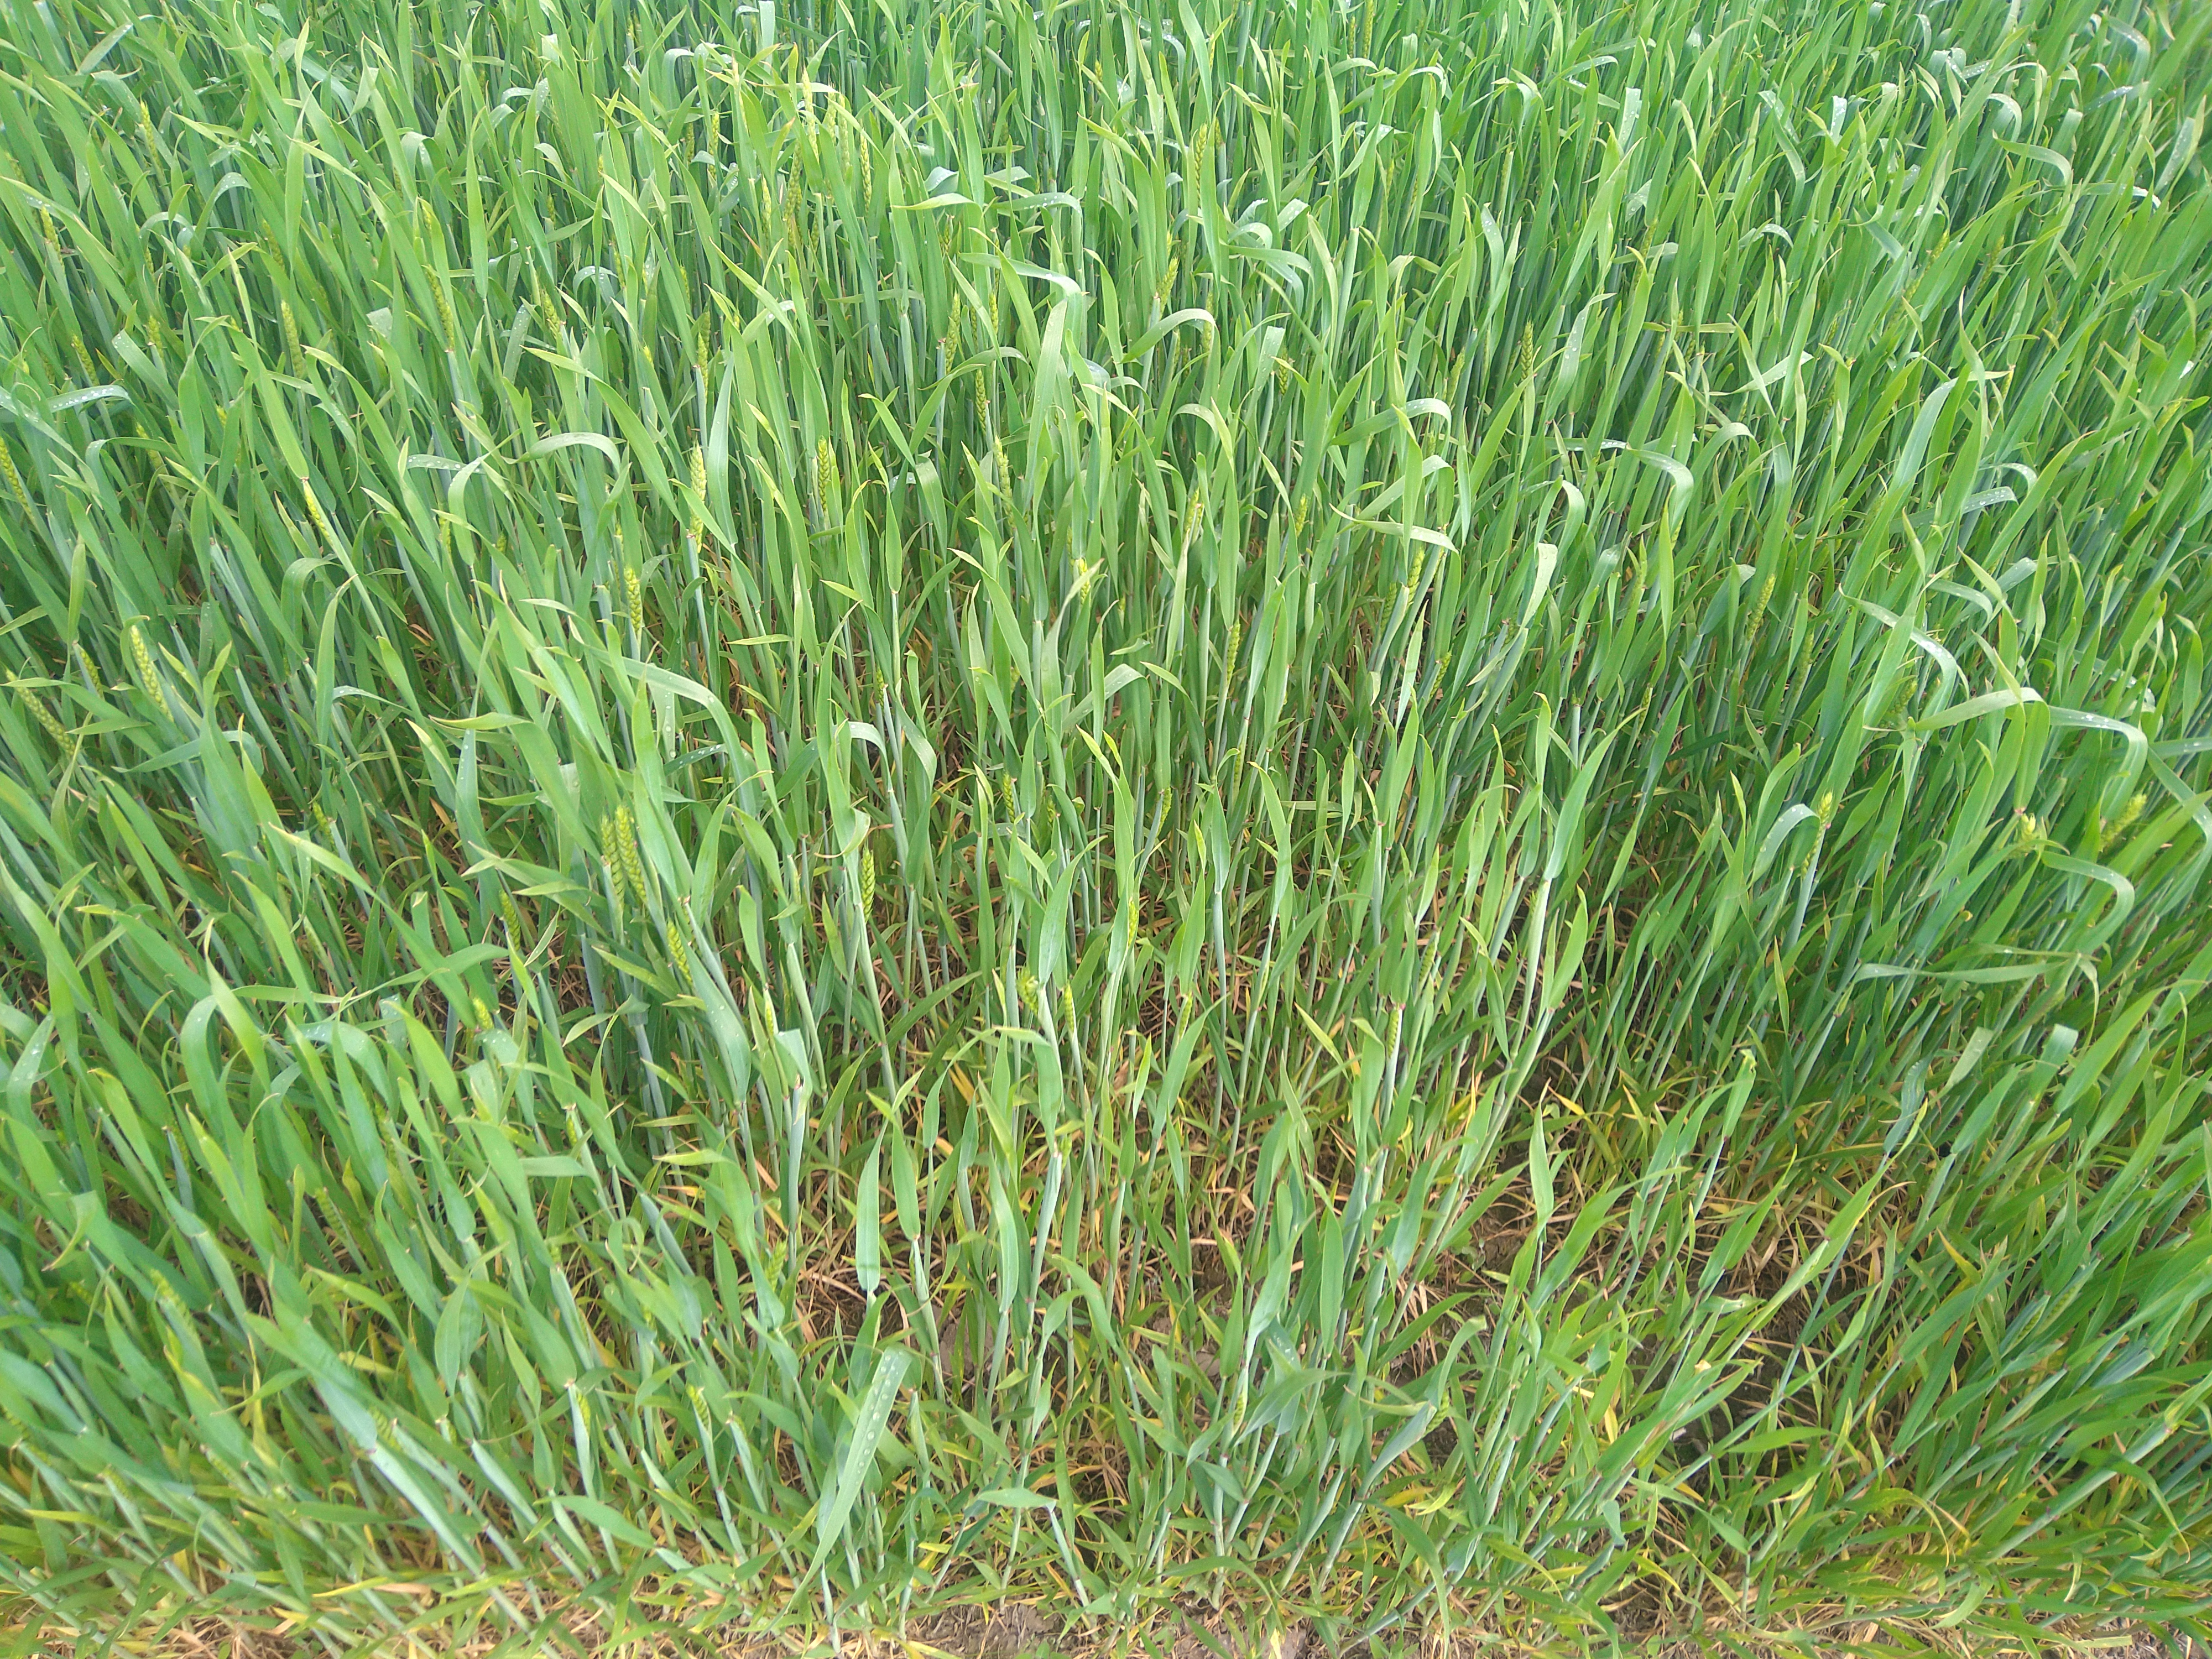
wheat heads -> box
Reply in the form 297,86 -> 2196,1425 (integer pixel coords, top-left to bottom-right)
707,112 -> 720,177
699,312 -> 709,339
1521,321 -> 1534,382
767,996 -> 775,1043
763,182 -> 770,246
306,481 -> 329,537
645,345 -> 652,365
1278,343 -> 1290,390
1348,17 -> 1359,91
2046,304 -> 2074,358
1231,1377 -> 1246,1421
943,296 -> 959,370
1216,118 -> 1221,150
551,1243 -> 559,1267
2145,1197 -> 2160,1215
1926,1157 -> 1945,1192
1672,518 -> 1683,549
617,526 -> 623,562
392,164 -> 402,197
1017,977 -> 1040,1010
1296,497 -> 1309,536
683,902 -> 701,949
1633,221 -> 1657,291
315,1185 -> 344,1238
993,234 -> 1002,286
1234,746 -> 1243,792
2015,1300 -> 2045,1343
0,437 -> 34,519
425,266 -> 454,345
157,1273 -> 193,1335
1879,683 -> 1914,729
699,335 -> 708,381
1502,147 -> 1512,184
1795,794 -> 1832,876
1074,559 -> 1091,602
439,513 -> 452,555
370,1409 -> 403,1453
1193,125 -> 1208,204
424,205 -> 431,234
1490,1398 -> 1504,1436
819,438 -> 828,510
688,122 -> 695,160
613,243 -> 624,287
1444,352 -> 1463,404
597,818 -> 623,901
993,425 -> 1013,526
1641,683 -> 1653,720
808,26 -> 814,56
1185,347 -> 1191,377
139,425 -> 168,482
1128,900 -> 1138,952
1677,569 -> 1690,598
541,291 -> 561,335
475,71 -> 485,92
1825,384 -> 1836,424
549,194 -> 555,219
1822,315 -> 1839,359
989,121 -> 1009,160
689,449 -> 705,541
1179,997 -> 1190,1037
141,102 -> 158,165
859,135 -> 869,209
2001,370 -> 2013,404
625,567 -> 641,627
1427,1394 -> 1448,1434
797,32 -> 804,65
532,46 -> 541,77
1157,786 -> 1171,836
2183,1174 -> 2203,1188
131,625 -> 171,723
1523,147 -> 1535,192
1095,61 -> 1101,82
734,310 -> 739,328
495,532 -> 505,554
1116,593 -> 1125,625
2017,814 -> 2038,851
764,1242 -> 788,1292
1407,549 -> 1422,603
136,226 -> 151,273
667,919 -> 693,989
474,1000 -> 494,1035
1930,231 -> 1948,268
1703,94 -> 1728,169
1159,256 -> 1179,310
971,308 -> 976,340
1683,337 -> 1694,361
781,1 -> 791,38
1978,236 -> 2004,289
1793,633 -> 1812,695
973,370 -> 989,433
940,225 -> 954,254
1892,273 -> 1923,327
74,1283 -> 106,1315
568,1113 -> 577,1144
1387,162 -> 1395,193
694,1389 -> 710,1429
17,684 -> 74,754
1192,506 -> 1205,538
2098,796 -> 2147,847
1432,652 -> 1451,697
75,337 -> 99,387
800,71 -> 818,162
147,316 -> 162,353
1166,236 -> 1171,257
262,219 -> 281,271
1648,330 -> 1666,371
1185,487 -> 1199,532
827,90 -> 835,140
810,211 -> 819,251
2102,1168 -> 2147,1215
612,555 -> 619,597
1820,57 -> 1837,98
500,891 -> 523,952
1385,1008 -> 1400,1057
411,56 -> 417,87
1672,312 -> 1683,348
547,98 -> 561,139
1065,984 -> 1074,1033
1411,170 -> 1420,205
215,403 -> 228,428
314,806 -> 335,852
1208,32 -> 1216,69
1360,0 -> 1374,71
2041,1283 -> 2077,1322
1202,296 -> 1213,355
378,1099 -> 399,1166
5,149 -> 38,232
1749,574 -> 1774,638
573,1385 -> 590,1430
1174,332 -> 1181,374
812,0 -> 823,47
615,811 -> 650,900
1002,774 -> 1017,819
786,212 -> 794,251
875,667 -> 890,712
596,153 -> 604,175
989,290 -> 998,333
1583,130 -> 1597,182
1048,793 -> 1056,832
1379,580 -> 1395,634
281,304 -> 303,378
79,643 -> 102,696
2000,1103 -> 2032,1161
43,207 -> 59,256
680,265 -> 689,308
861,847 -> 874,919
838,96 -> 847,186
783,146 -> 801,219
1419,937 -> 1438,991
1226,621 -> 1241,680
1011,669 -> 1018,695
